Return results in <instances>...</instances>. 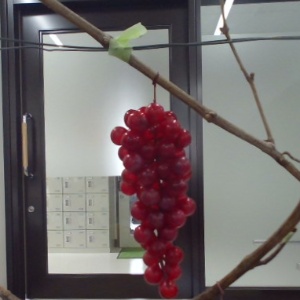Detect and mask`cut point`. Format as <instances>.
<instances>
[{"label": "cut point", "mask_w": 300, "mask_h": 300, "mask_svg": "<svg viewBox=\"0 0 300 300\" xmlns=\"http://www.w3.org/2000/svg\"><path fill=\"white\" fill-rule=\"evenodd\" d=\"M160 77V72H156V76L155 78L153 79L152 81V84H153V100H152V104L154 105H158V102L156 101V87H157V81Z\"/></svg>", "instance_id": "6a23745f"}]
</instances>
